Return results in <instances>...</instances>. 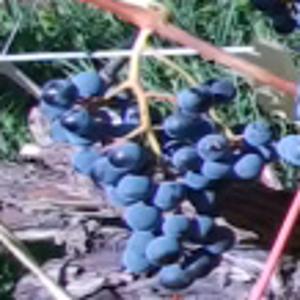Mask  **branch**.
<instances>
[{
	"label": "branch",
	"mask_w": 300,
	"mask_h": 300,
	"mask_svg": "<svg viewBox=\"0 0 300 300\" xmlns=\"http://www.w3.org/2000/svg\"><path fill=\"white\" fill-rule=\"evenodd\" d=\"M87 3L93 8L116 15L137 25H150L152 30L156 33L164 35L180 44L189 46L190 48H196L198 53L206 58L216 61L233 70L248 74L277 89L292 94L300 93L299 81L281 76L257 63L240 58L236 55L223 54L220 48H217L197 35L182 30L156 16L141 12L114 0H87Z\"/></svg>",
	"instance_id": "1"
}]
</instances>
